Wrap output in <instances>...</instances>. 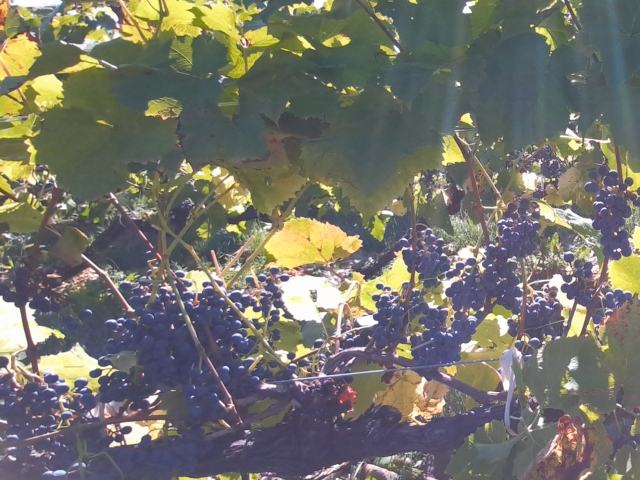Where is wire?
<instances>
[{
    "label": "wire",
    "instance_id": "obj_1",
    "mask_svg": "<svg viewBox=\"0 0 640 480\" xmlns=\"http://www.w3.org/2000/svg\"><path fill=\"white\" fill-rule=\"evenodd\" d=\"M499 361H500L499 357H489V358H482V359H467L465 361H460V362H438V363L411 364V365H404V366L388 368V369H384V370L383 369H380V370L379 369H373V370L356 369L354 371L336 372V373H331V374H327V375L301 376V377H297V378H282V379L270 380V381L266 382V385L267 386H272V385L285 384V383H299V382H303V381L329 380V379L339 378V377L356 376L358 374L387 375V374H391V373H396V372L406 371V370H413V369L440 368V367H462V366H467V365H470V364H484V363L499 362Z\"/></svg>",
    "mask_w": 640,
    "mask_h": 480
}]
</instances>
